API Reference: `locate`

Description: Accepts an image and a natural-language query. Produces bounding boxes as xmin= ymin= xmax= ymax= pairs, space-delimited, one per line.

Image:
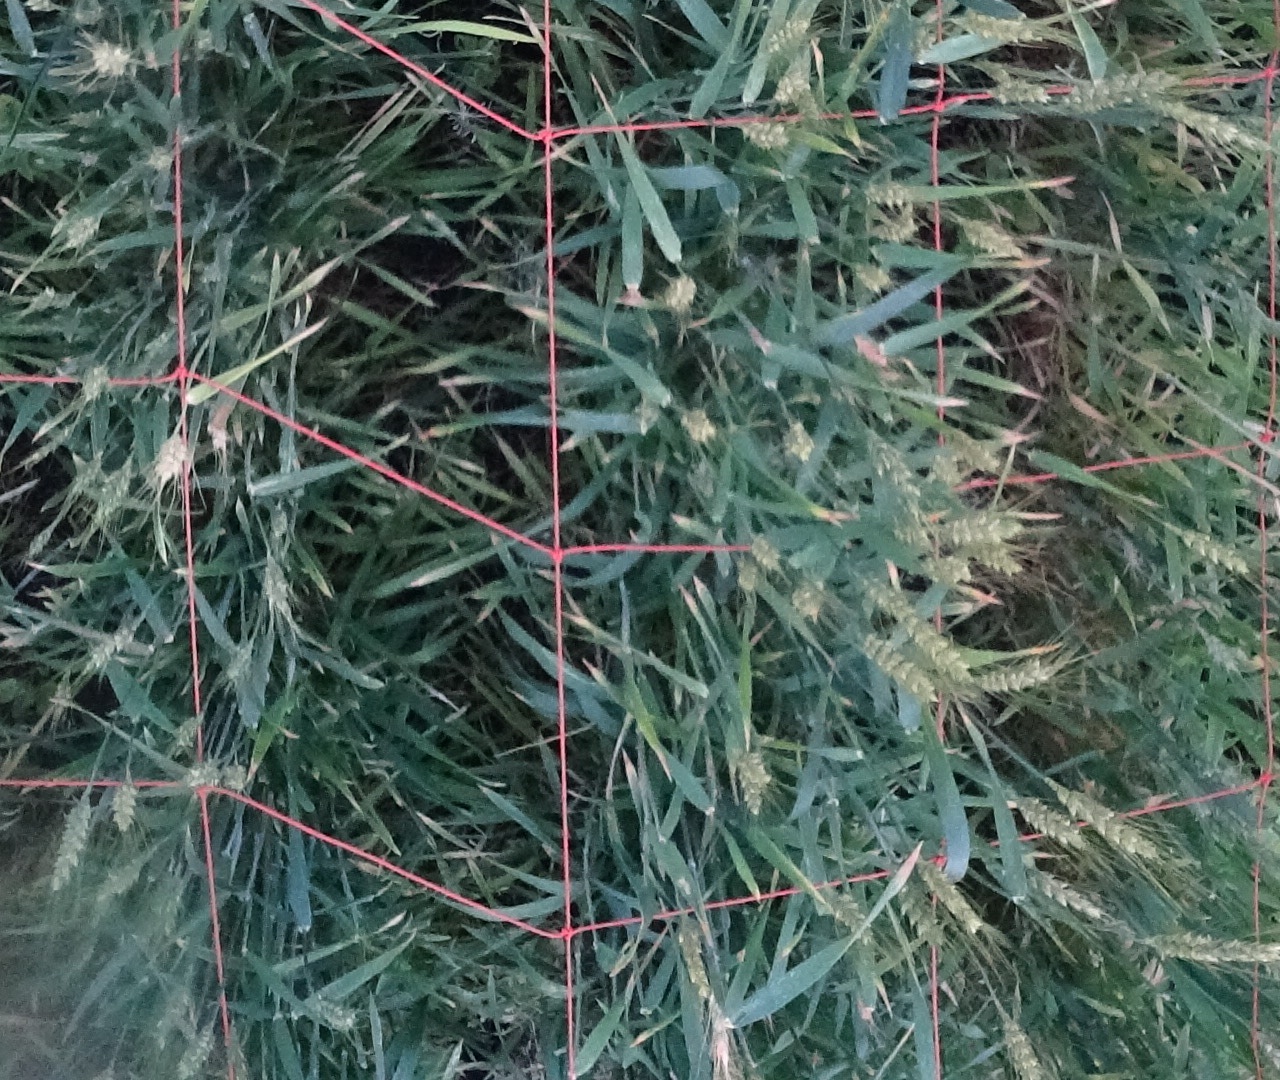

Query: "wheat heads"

xmin=673 ymin=921 xmax=710 ymax=993
xmin=676 ymin=413 xmax=714 ymax=439
xmin=864 ymin=570 xmax=970 ymax=682
xmin=178 ymin=1017 xmax=216 ymax=1072
xmin=768 ymin=60 xmax=804 ymax=103
xmin=224 ymin=1022 xmax=247 ymax=1074
xmin=887 ymin=858 xmax=945 ymax=949
xmin=788 ymin=417 xmax=815 ymax=460
xmin=961 ymin=534 xmax=1024 ymax=580
xmin=70 ymin=456 xmax=103 ymax=495
xmin=153 ymin=966 xmax=196 ymax=1043
xmin=959 ymin=209 xmax=1019 ymax=256
xmin=187 ymin=761 xmax=215 ymax=787
xmin=918 ymin=853 xmax=978 ymax=932
xmin=258 ymin=555 xmax=289 ymax=616
xmin=1076 ymin=68 xmax=1165 ymax=108
xmin=768 ymin=18 xmax=815 ymax=46
xmin=68 ymin=201 xmax=100 ymax=251
xmin=1027 ymin=872 xmax=1110 ymax=920
xmin=1202 ymin=632 xmax=1236 ymax=668
xmin=856 ymin=260 xmax=886 ymax=292
xmin=855 ymin=327 xmax=884 ymax=365
xmin=85 ymin=622 xmax=136 ymax=668
xmin=1168 ymin=100 xmax=1261 ymax=156
xmin=936 ymin=511 xmax=1031 ymax=543
xmin=867 ymin=224 xmax=918 ymax=242
xmin=1054 ymin=782 xmax=1163 ymax=858
xmin=869 ymin=428 xmax=925 ymax=501
xmin=706 ymin=990 xmax=734 ymax=1065
xmin=180 ymin=706 xmax=207 ymax=745
xmin=748 ymin=527 xmax=778 ymax=565
xmin=100 ymin=458 xmax=135 ymax=526
xmin=224 ymin=638 xmax=252 ymax=678
xmin=1002 ymin=1009 xmax=1037 ymax=1080
xmin=1013 ymin=795 xmax=1090 ymax=840
xmin=115 ymin=775 xmax=140 ymax=820
xmin=963 ymin=8 xmax=1036 ymax=39
xmin=320 ymin=994 xmax=351 ymax=1026
xmin=54 ymin=790 xmax=91 ymax=885
xmin=80 ymin=357 xmax=115 ymax=400
xmin=159 ymin=431 xmax=187 ymax=486
xmin=91 ymin=38 xmax=125 ymax=73
xmin=994 ymin=74 xmax=1040 ymax=109
xmin=228 ymin=759 xmax=247 ymax=790
xmin=98 ymin=848 xmax=156 ymax=894
xmin=665 ymin=270 xmax=692 ymax=305
xmin=738 ymin=554 xmax=759 ymax=585
xmin=28 ymin=429 xmax=74 ymax=467
xmin=735 ymin=742 xmax=778 ymax=810
xmin=1182 ymin=521 xmax=1252 ymax=576
xmin=867 ymin=180 xmax=912 ymax=200
xmin=978 ymin=652 xmax=1059 ymax=693
xmin=731 ymin=113 xmax=785 ymax=148
xmin=795 ymin=582 xmax=821 ymax=620
xmin=1143 ymin=926 xmax=1280 ymax=969
xmin=817 ymin=885 xmax=877 ymax=943
xmin=952 ymin=426 xmax=1003 ymax=473
xmin=856 ymin=632 xmax=939 ymax=703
